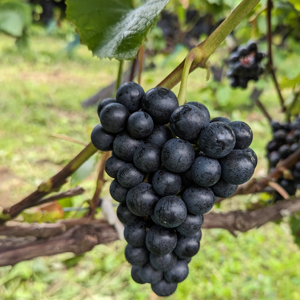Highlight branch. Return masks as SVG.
<instances>
[{
    "mask_svg": "<svg viewBox=\"0 0 300 300\" xmlns=\"http://www.w3.org/2000/svg\"><path fill=\"white\" fill-rule=\"evenodd\" d=\"M260 1L261 0H242L234 10L222 20L218 28L211 33L208 38L196 46L199 48V51L191 64L189 74L198 67H203L206 64L211 54L223 44L233 29L243 22L245 17Z\"/></svg>",
    "mask_w": 300,
    "mask_h": 300,
    "instance_id": "325d2c04",
    "label": "branch"
},
{
    "mask_svg": "<svg viewBox=\"0 0 300 300\" xmlns=\"http://www.w3.org/2000/svg\"><path fill=\"white\" fill-rule=\"evenodd\" d=\"M98 151L99 150L96 149V147H94L90 141L88 145L80 153H78L60 172H58L56 175H53L46 182H41L35 192L16 204L3 209L0 213V224H5L11 221L26 209H32L37 205L49 203L57 199L82 194L83 188L81 186H76L63 193L54 194L45 198V196L50 193L59 192L67 183V178L75 173L84 162H86L90 157H93Z\"/></svg>",
    "mask_w": 300,
    "mask_h": 300,
    "instance_id": "30e6481e",
    "label": "branch"
},
{
    "mask_svg": "<svg viewBox=\"0 0 300 300\" xmlns=\"http://www.w3.org/2000/svg\"><path fill=\"white\" fill-rule=\"evenodd\" d=\"M184 62H185V58L170 74H168L155 87H165L169 90L176 87V85L182 81Z\"/></svg>",
    "mask_w": 300,
    "mask_h": 300,
    "instance_id": "170604dd",
    "label": "branch"
}]
</instances>
